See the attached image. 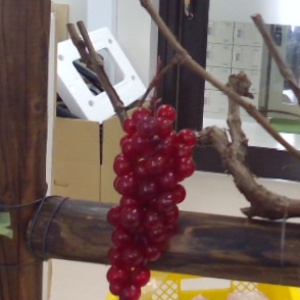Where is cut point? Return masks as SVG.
<instances>
[{
	"mask_svg": "<svg viewBox=\"0 0 300 300\" xmlns=\"http://www.w3.org/2000/svg\"><path fill=\"white\" fill-rule=\"evenodd\" d=\"M155 88H154V96H153V118L156 116V108H157V103L162 101V97H158L157 99V91L160 88L159 83H155Z\"/></svg>",
	"mask_w": 300,
	"mask_h": 300,
	"instance_id": "1",
	"label": "cut point"
}]
</instances>
